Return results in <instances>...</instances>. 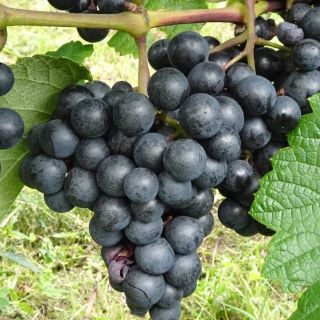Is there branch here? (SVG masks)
<instances>
[{"mask_svg": "<svg viewBox=\"0 0 320 320\" xmlns=\"http://www.w3.org/2000/svg\"><path fill=\"white\" fill-rule=\"evenodd\" d=\"M248 9L232 7L199 10L126 11L116 14L59 13L21 10L0 4V26L37 25L117 29L134 37L159 26L201 22H233L248 27Z\"/></svg>", "mask_w": 320, "mask_h": 320, "instance_id": "30e6481e", "label": "branch"}]
</instances>
